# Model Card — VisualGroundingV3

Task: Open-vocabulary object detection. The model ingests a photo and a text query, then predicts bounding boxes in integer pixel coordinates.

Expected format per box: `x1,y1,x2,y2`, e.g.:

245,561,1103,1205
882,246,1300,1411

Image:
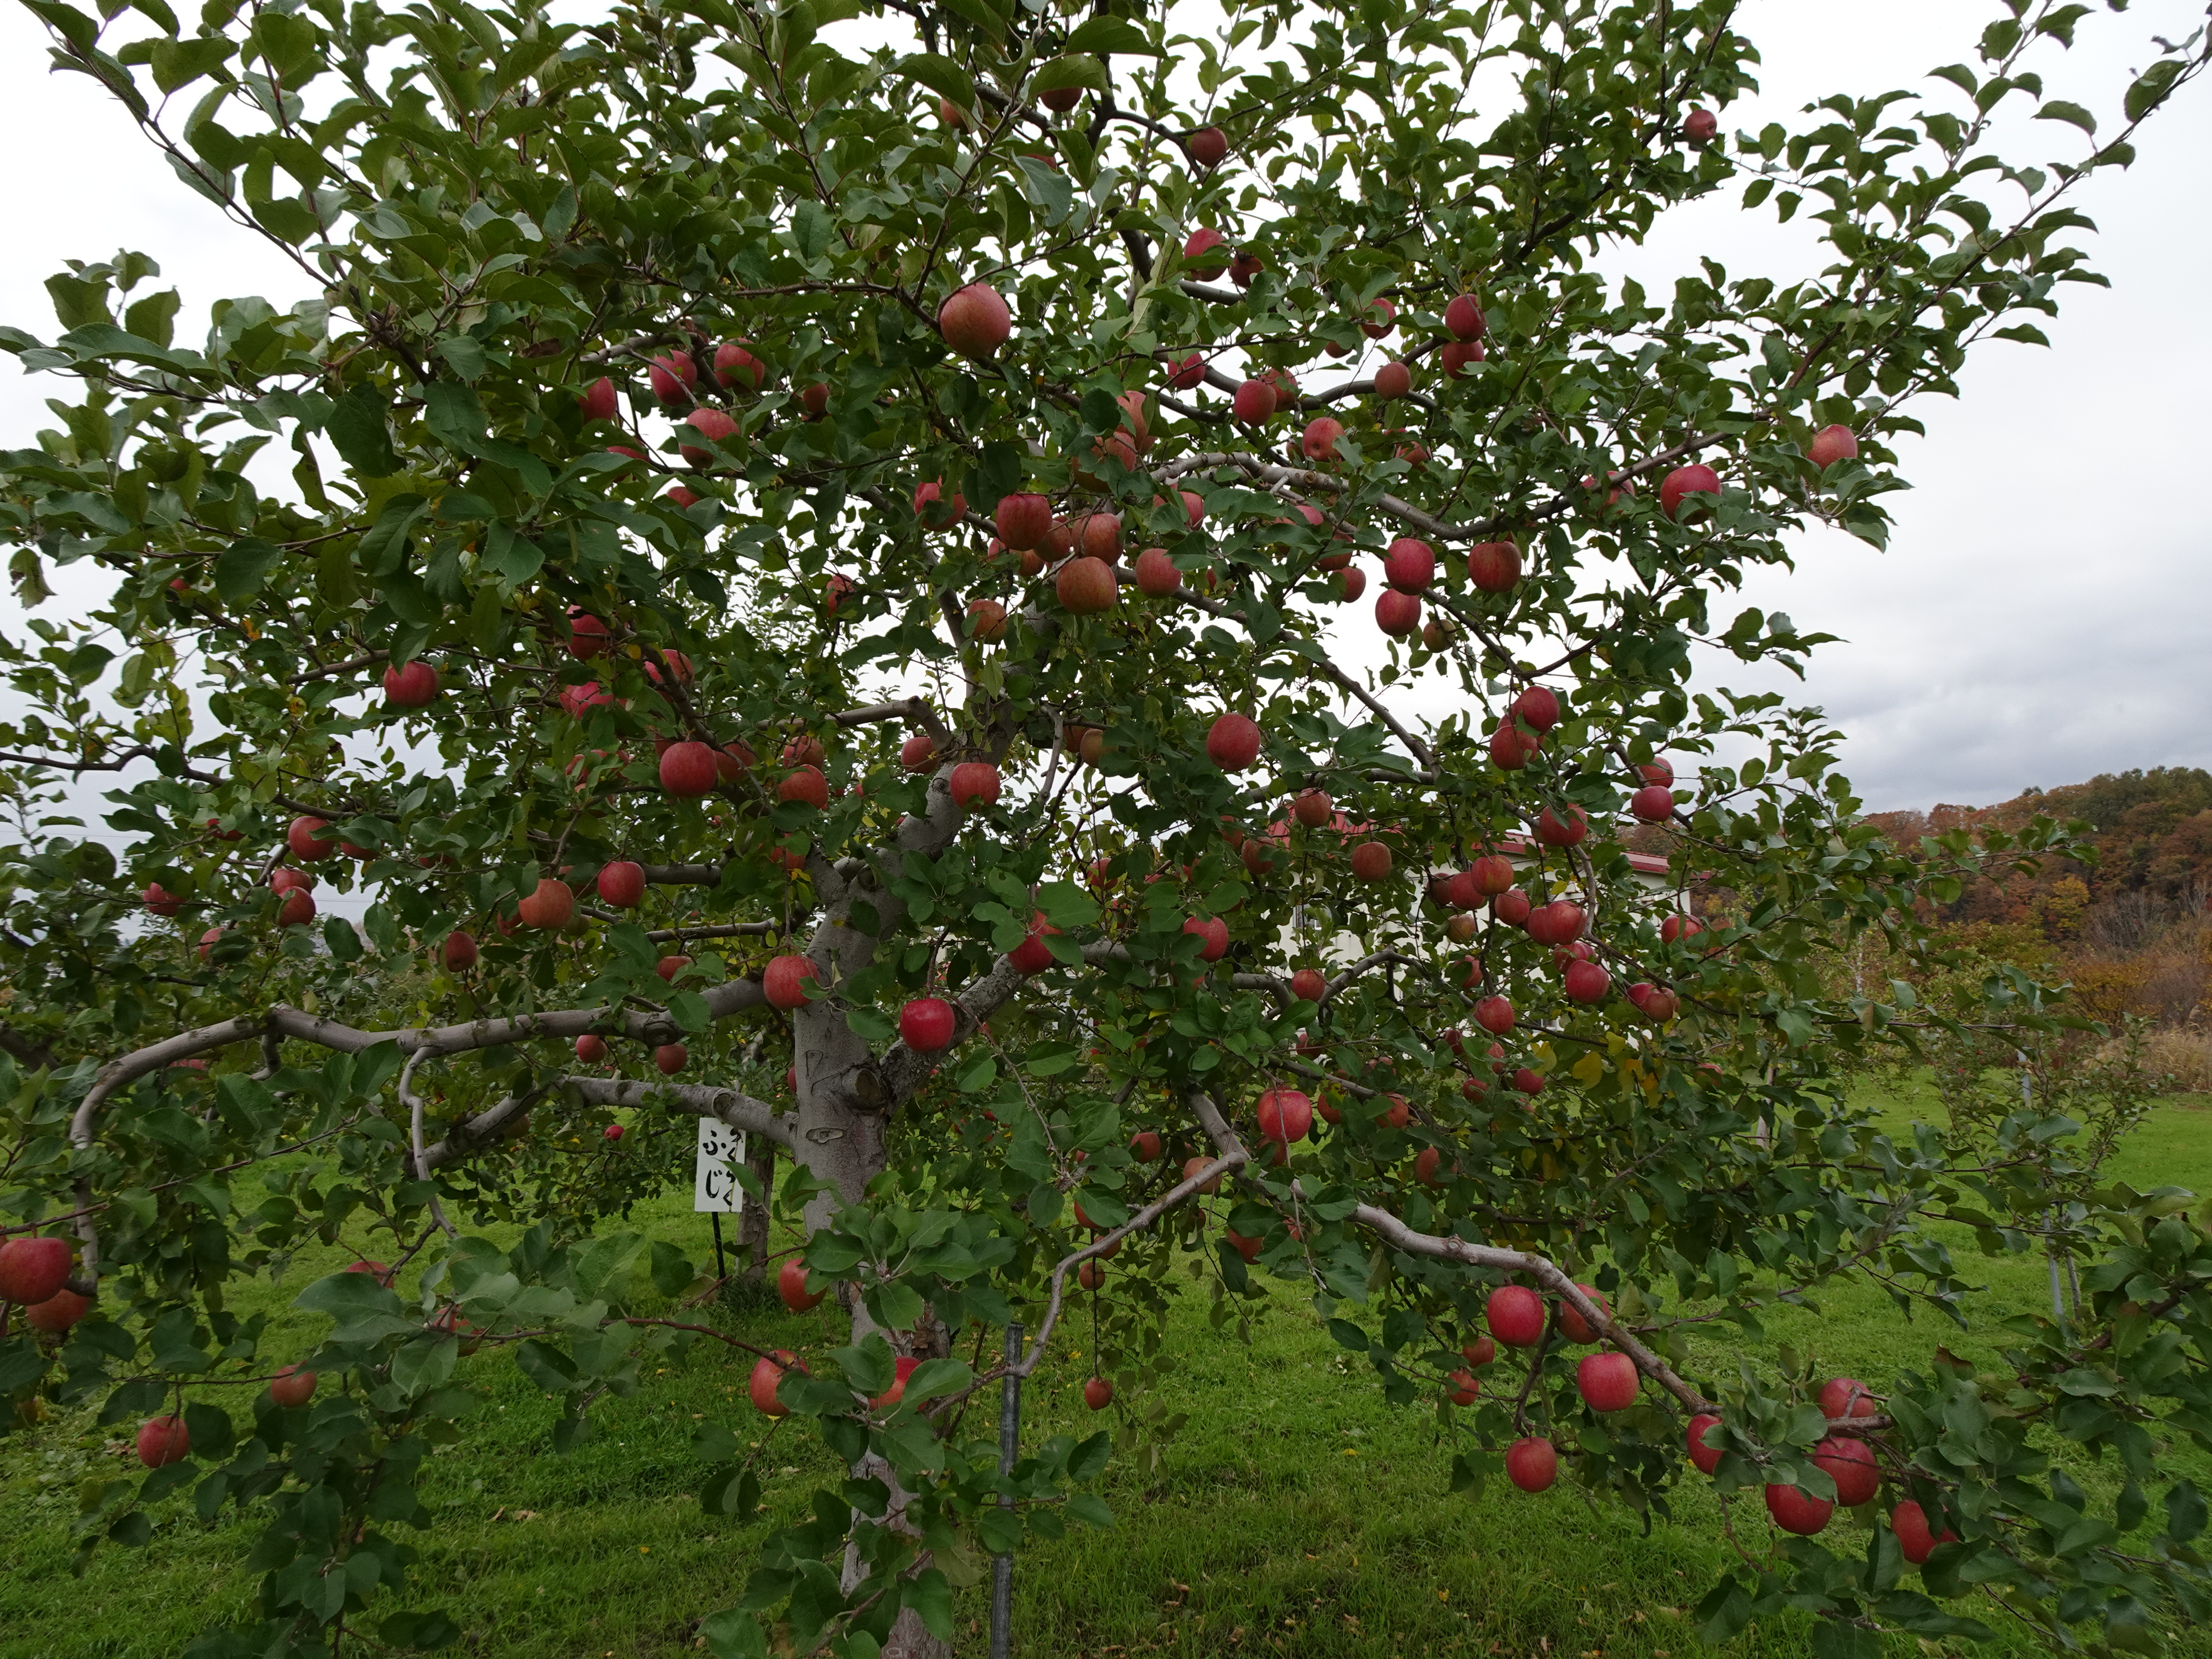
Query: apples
648,346,698,408
596,443,648,485
1209,878,1248,910
600,859,646,907
1659,464,1722,528
1578,1352,1640,1413
1445,293,1493,347
496,893,546,942
1374,360,1414,401
1553,1282,1612,1347
1146,490,1209,530
782,732,827,777
1510,1066,1546,1098
1495,703,1548,752
655,1039,689,1076
1660,912,1705,954
1070,431,1136,493
1475,1225,1508,1253
167,576,192,598
777,1254,830,1313
196,925,249,967
657,739,719,799
1424,619,1457,655
916,1065,945,1105
788,384,822,425
1486,1127,1510,1148
271,862,314,907
773,764,831,816
205,803,251,843
942,280,1013,358
1017,885,1070,941
1551,941,1604,980
559,673,607,717
573,1029,610,1065
1539,799,1588,848
865,1353,930,1424
1375,1090,1410,1134
1462,1078,1489,1107
603,1122,627,1149
1497,1092,1536,1128
1693,1061,1725,1096
897,996,956,1055
1267,504,1325,557
1177,855,1203,890
1022,701,1061,744
1046,451,1072,480
81,736,109,759
0,1235,73,1306
995,491,1054,551
939,89,985,133
714,733,757,783
1365,1056,1398,1084
1260,365,1299,414
1182,913,1229,963
1294,787,1332,829
1764,1462,1835,1537
762,953,821,1012
1799,423,1860,486
1013,546,1045,577
1208,813,1243,855
1628,982,1663,1013
1130,611,1157,633
433,928,480,977
1077,1261,1108,1291
673,311,714,359
942,1089,963,1109
1359,296,1397,340
1573,470,1637,531
800,378,835,416
1072,511,1120,565
679,1274,721,1317
1257,1088,1312,1146
637,646,694,702
664,484,716,534
1277,1215,1315,1250
1349,841,1393,884
1127,1030,1172,1068
677,405,744,468
457,524,491,556
515,877,575,932
1059,719,1086,753
0,1223,16,1252
1442,1028,1467,1059
1226,1197,1282,1268
1158,1086,1181,1112
834,777,864,808
1182,1201,1210,1225
1165,346,1207,391
1294,1034,1324,1062
1169,952,1211,996
1467,540,1522,594
819,572,862,623
1484,1043,1509,1077
985,535,1023,578
1317,1080,1367,1126
3,1391,41,1433
1311,530,1353,572
1890,1492,1977,1567
900,734,940,777
1130,1131,1161,1163
340,1257,397,1306
1563,958,1613,1007
1470,855,1515,898
1370,1182,1394,1203
1075,1141,1104,1170
516,309,569,364
1521,900,1587,948
1686,1413,1743,1475
1073,1186,1120,1231
1415,1147,1464,1193
875,392,896,414
1055,556,1119,616
751,828,809,882
1460,1335,1495,1371
1471,994,1515,1038
559,861,600,899
785,1063,814,1096
1634,756,1675,791
961,599,1011,646
1010,921,1055,979
1384,539,1435,596
140,866,194,919
1451,955,1487,992
340,817,385,863
1446,870,1491,912
1206,1035,1234,1062
134,1412,190,1473
713,808,734,829
569,678,633,725
1509,515,1541,546
501,1111,531,1142
1204,711,1260,773
559,594,632,669
1137,873,1175,898
1379,421,1408,453
894,814,911,835
1241,1132,1290,1172
2119,1298,2155,1332
382,656,441,709
1440,333,1485,381
1036,519,1071,562
1080,728,1119,771
1487,728,1536,773
553,786,619,826
269,1362,320,1409
1183,1157,1224,1196
1324,323,1357,359
712,333,767,393
1493,888,1531,926
1231,377,1277,427
562,745,632,794
1087,855,1120,892
1395,439,1431,477
1816,1377,1877,1441
1085,1062,1112,1090
287,812,335,865
1078,1042,1113,1077
1644,988,1683,1023
1444,1365,1480,1408
1135,546,1181,601
1299,415,1349,467
1496,408,1544,457
1374,591,1421,637
748,1346,814,1416
1014,146,1058,183
553,370,620,432
952,1117,969,1136
1487,1285,1545,1350
1082,1375,1115,1412
980,1090,1014,1130
374,300,406,328
106,1441,132,1466
165,1053,210,1101
1185,124,1228,166
1105,389,1162,453
1242,834,1278,877
973,1125,998,1149
1099,894,1130,931
1038,68,1086,114
1425,871,1458,909
1442,914,1479,947
1184,227,1229,281
1091,1229,1123,1262
1231,243,1277,290
1811,1435,1881,1509
1630,785,1674,827
655,953,697,989
1290,968,1326,1005
429,1300,488,1357
1514,687,1561,737
912,468,970,535
24,1282,88,1334
1684,109,1718,146
1620,1053,1661,1096
1506,1435,1560,1494
976,1016,1014,1051
268,887,318,932
414,844,445,871
1329,563,1366,603
948,760,1002,816
1202,562,1238,600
